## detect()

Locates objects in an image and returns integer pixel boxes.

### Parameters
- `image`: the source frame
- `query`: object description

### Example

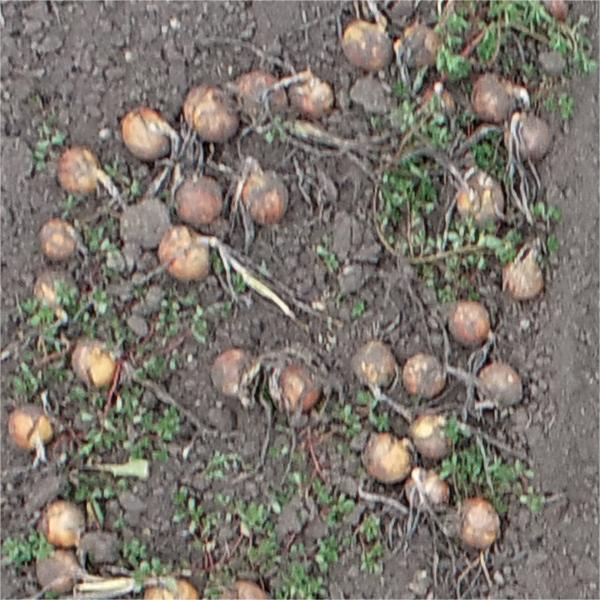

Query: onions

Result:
[476,362,521,406]
[398,24,441,68]
[208,350,250,396]
[454,176,504,219]
[408,469,447,505]
[173,178,219,226]
[400,351,444,397]
[275,367,322,413]
[6,407,55,449]
[294,79,332,118]
[363,432,412,479]
[42,500,83,546]
[474,75,526,120]
[414,418,452,463]
[185,85,238,139]
[138,577,197,599]
[56,148,101,192]
[34,269,77,308]
[239,174,286,222]
[445,300,488,345]
[37,551,78,592]
[340,21,393,70]
[119,108,173,159]
[158,225,209,279]
[235,68,294,124]
[454,497,500,547]
[542,0,566,23]
[35,218,78,263]
[351,340,397,387]
[508,116,550,159]
[502,257,542,299]
[70,340,117,387]
[231,577,267,599]
[423,81,459,117]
